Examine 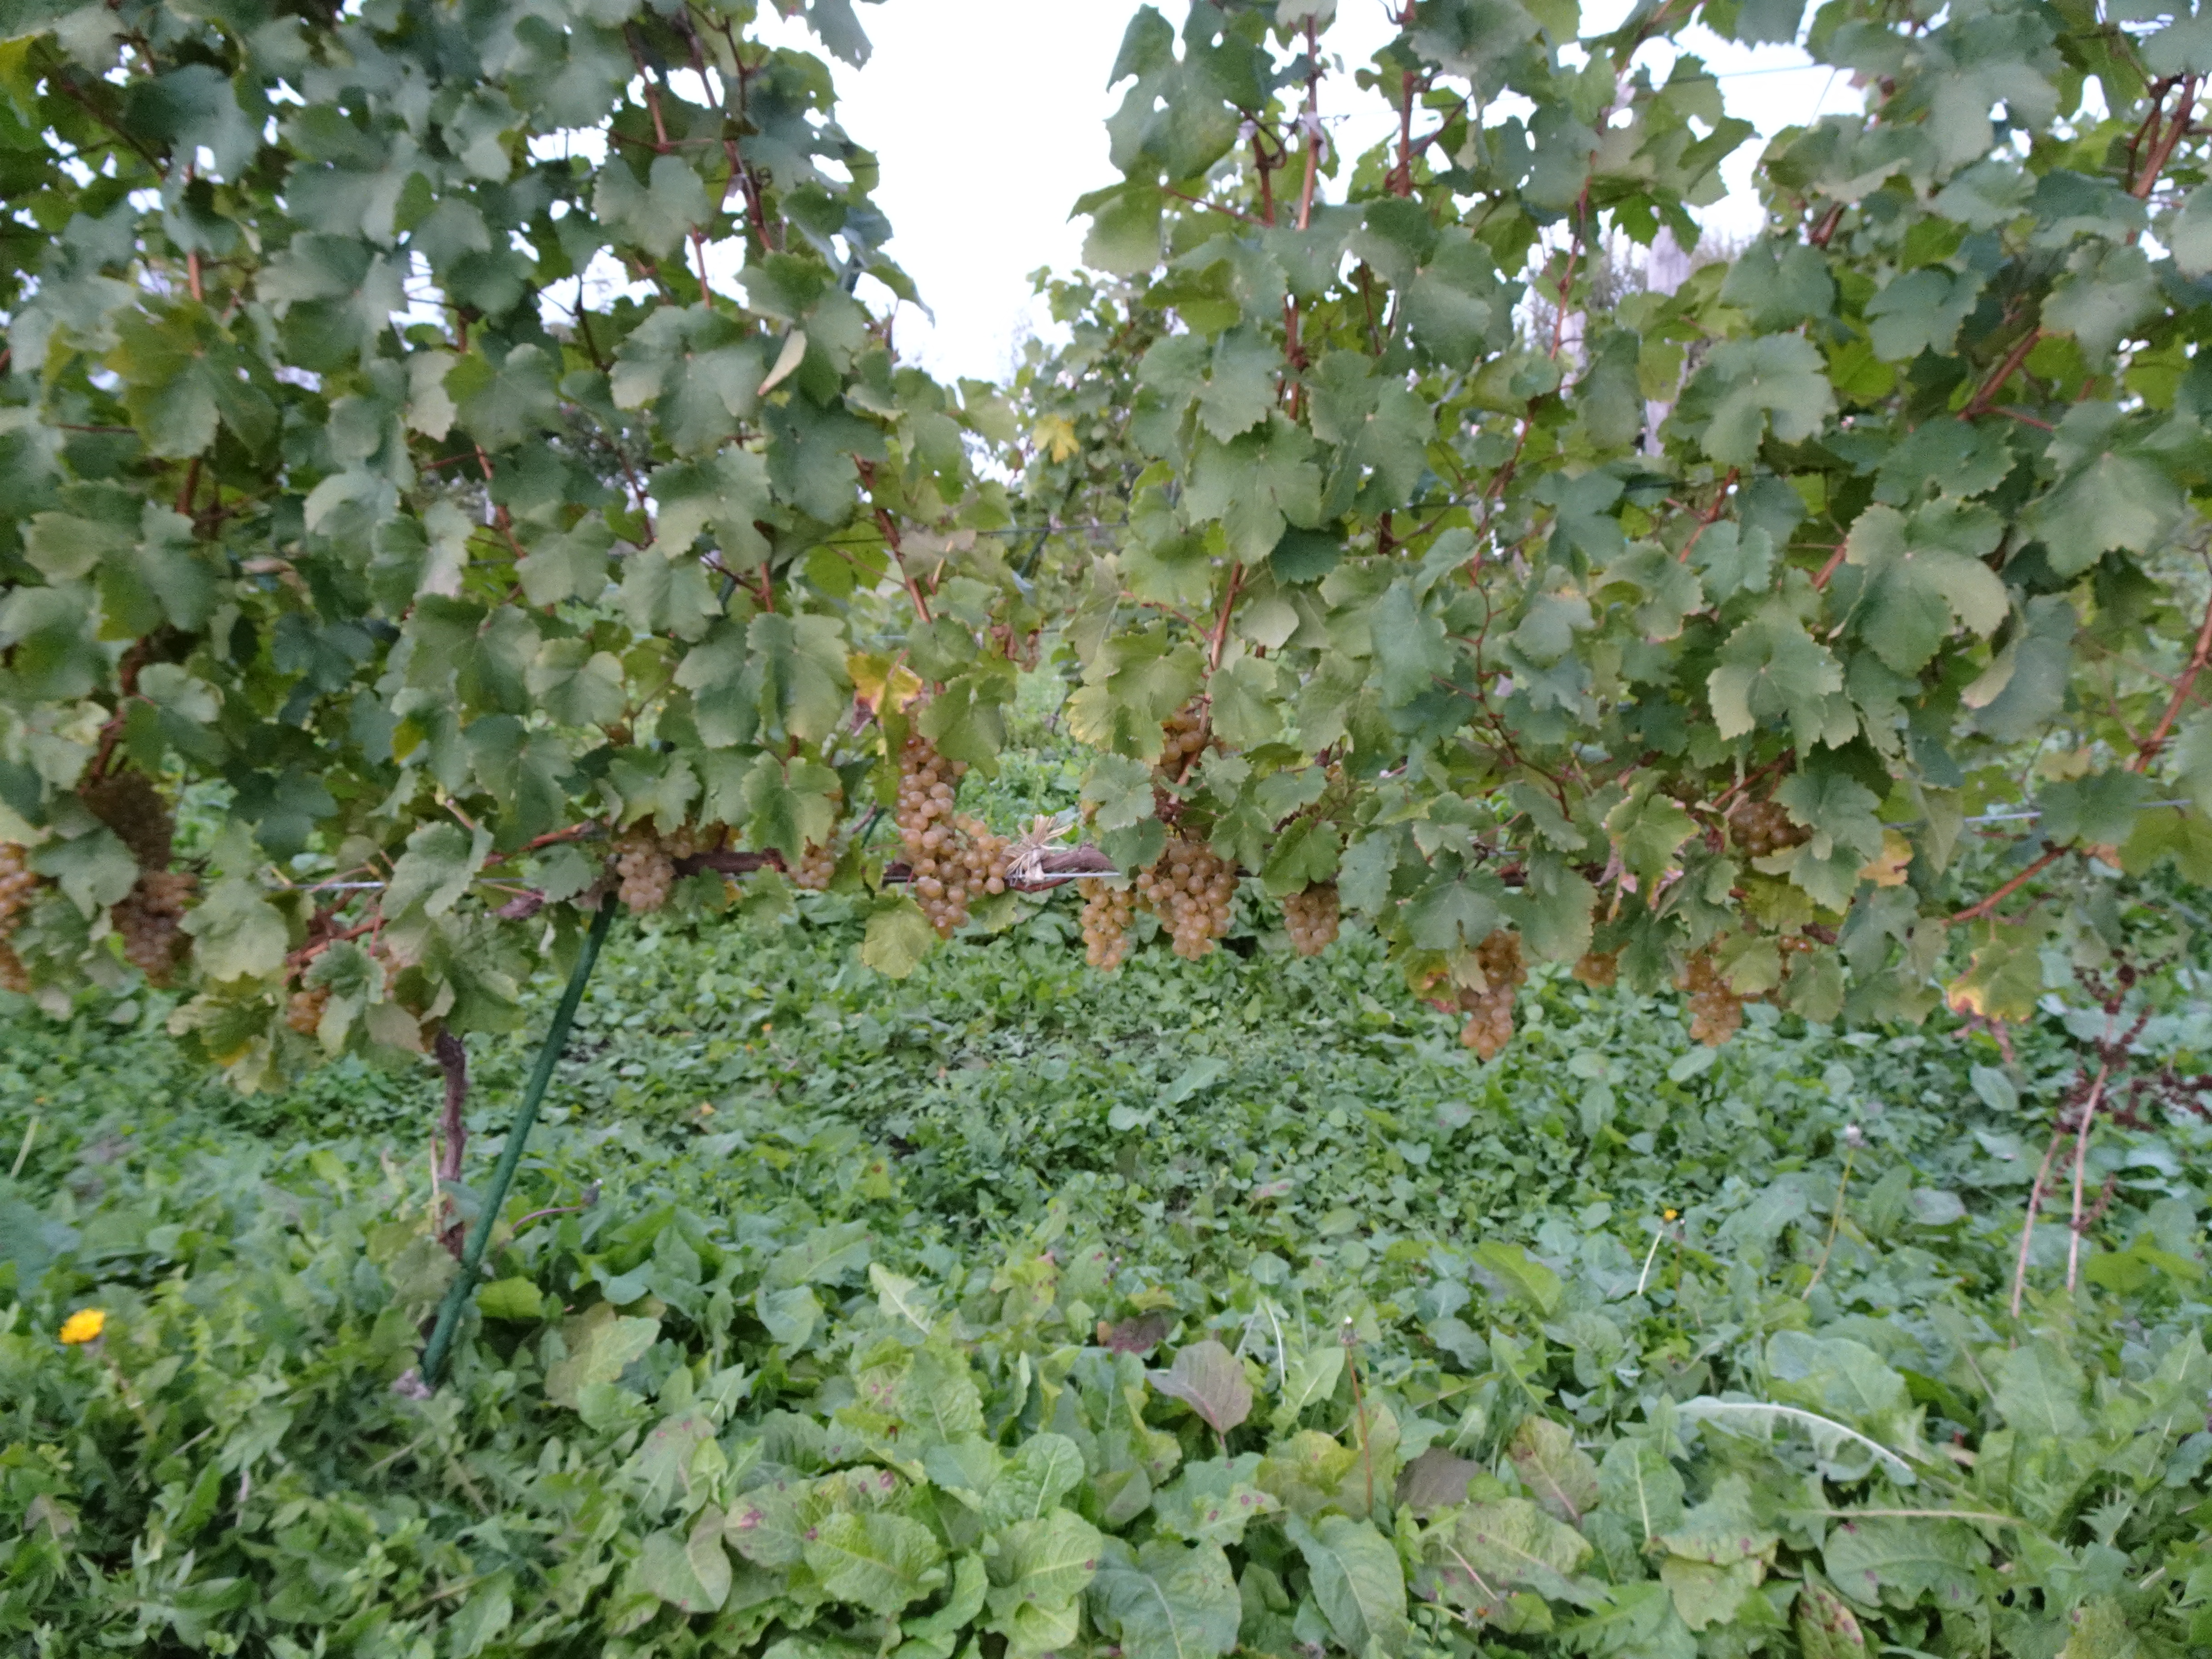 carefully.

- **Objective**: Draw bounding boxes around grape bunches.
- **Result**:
[1570,946,1622,989]
[1137,826,1240,961]
[1458,929,1528,1062]
[782,784,849,890]
[1282,885,1341,958]
[903,811,1017,940]
[1776,933,1816,972]
[1144,694,1201,782]
[892,701,969,830]
[612,827,676,916]
[1672,946,1744,1048]
[109,867,203,987]
[1730,799,1815,859]
[374,953,439,1055]
[646,805,725,859]
[75,759,177,873]
[0,841,38,991]
[1075,875,1137,970]
[291,960,330,1038]
[699,828,741,915]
